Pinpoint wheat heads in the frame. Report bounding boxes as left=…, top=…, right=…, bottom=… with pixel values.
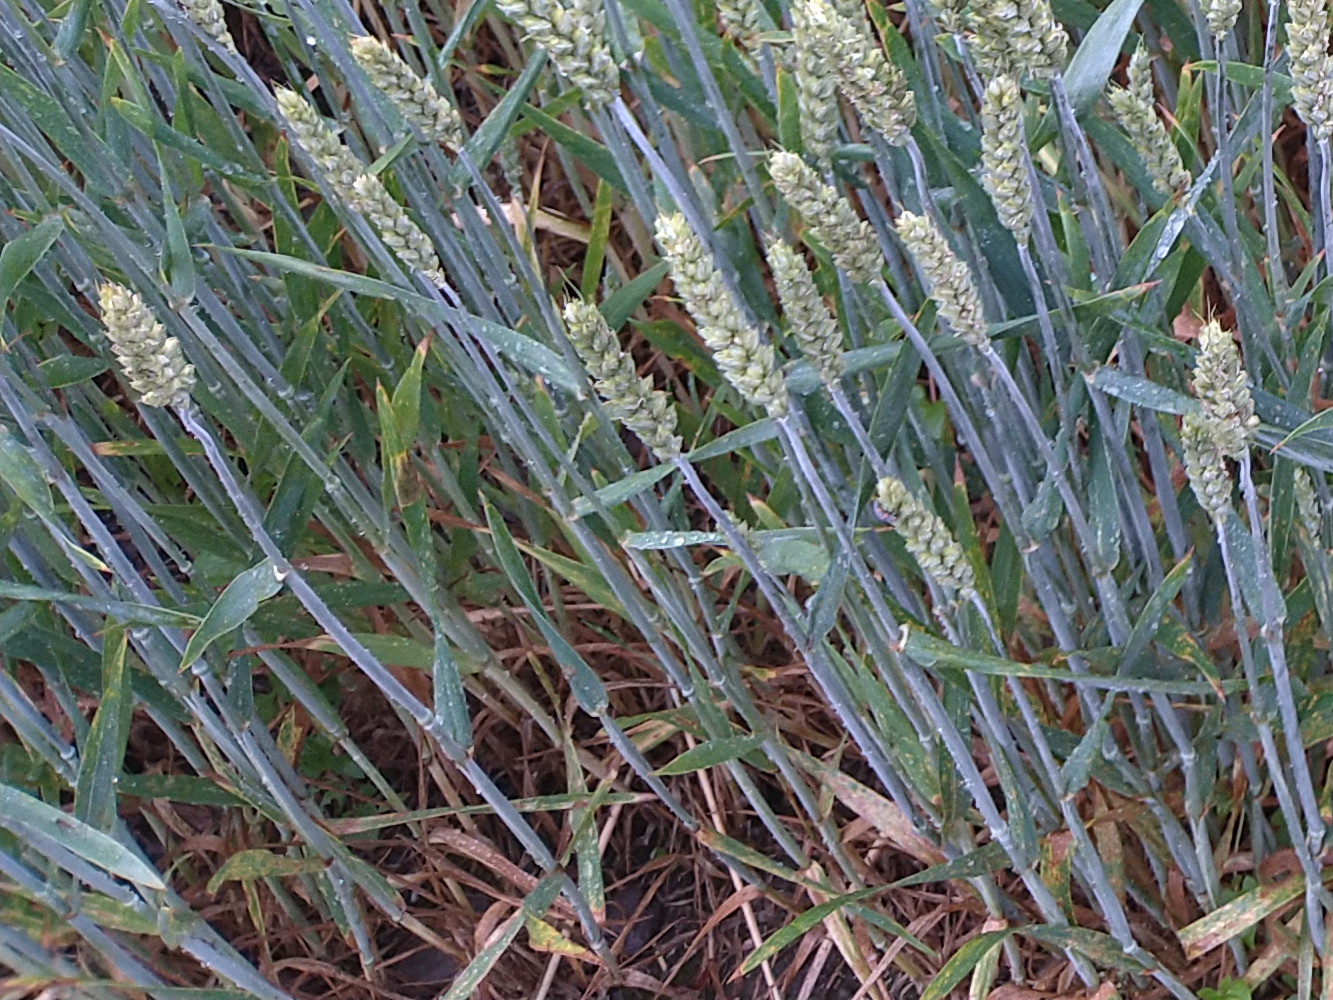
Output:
left=954, top=0, right=1060, bottom=65
left=768, top=157, right=885, bottom=283
left=697, top=0, right=763, bottom=51
left=981, top=78, right=1034, bottom=242
left=561, top=304, right=681, bottom=461
left=1175, top=412, right=1224, bottom=515
left=1194, top=319, right=1221, bottom=413
left=1208, top=324, right=1258, bottom=449
left=895, top=213, right=986, bottom=345
left=350, top=39, right=463, bottom=146
left=274, top=92, right=357, bottom=207
left=356, top=175, right=443, bottom=283
left=96, top=285, right=165, bottom=404
left=116, top=285, right=198, bottom=387
left=416, top=0, right=617, bottom=102
left=790, top=0, right=919, bottom=143
left=1285, top=0, right=1333, bottom=135
left=1129, top=44, right=1151, bottom=107
left=655, top=220, right=790, bottom=417
left=834, top=0, right=873, bottom=42
left=560, top=0, right=611, bottom=62
left=1106, top=90, right=1188, bottom=195
left=792, top=0, right=840, bottom=175
left=766, top=240, right=844, bottom=382
left=965, top=0, right=1007, bottom=60
left=146, top=0, right=233, bottom=51
left=876, top=480, right=975, bottom=597
left=1213, top=0, right=1260, bottom=35
left=1294, top=466, right=1322, bottom=544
